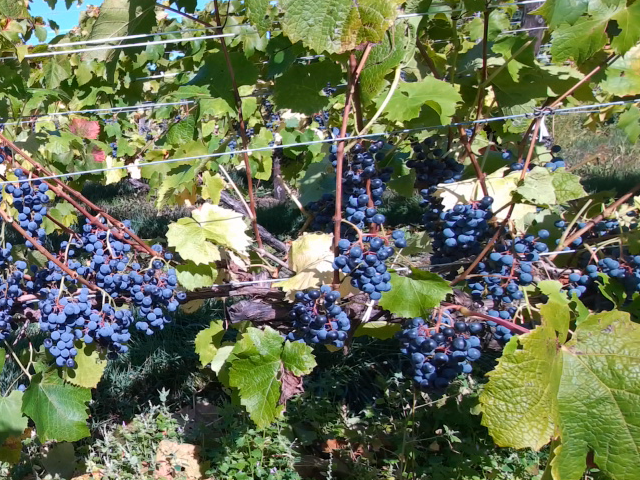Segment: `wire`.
<instances>
[{
	"label": "wire",
	"mask_w": 640,
	"mask_h": 480,
	"mask_svg": "<svg viewBox=\"0 0 640 480\" xmlns=\"http://www.w3.org/2000/svg\"><path fill=\"white\" fill-rule=\"evenodd\" d=\"M441 127H442L441 123H432L428 126H412L408 128L393 129V130L379 131V132H365V133L354 134V135H339V136H332L329 138L311 139V140L295 142V143L293 141H289L284 144H267V145H261V146L236 149L233 151L211 152V153L201 154L196 156L174 157V158L165 159L161 161H148L147 163H144V164L126 163L117 167L100 168L95 170H76L75 172L65 171L61 173H53L49 176H30L25 179L2 180L1 184L2 185H20V184H28L33 181H51L56 178H63L68 176L77 177L78 175H97V174L110 173V172H119L128 168L147 169L151 166H163V165L172 164L176 162H192V161H198V160L209 159L214 157L235 156L238 154L270 150V149H287L290 147L297 148V147H304V146H309L313 144L331 143V142L341 141V140H356V139H363L368 137H381V136H389V135H395V134L410 133L415 131H430L432 129L441 128Z\"/></svg>",
	"instance_id": "1"
},
{
	"label": "wire",
	"mask_w": 640,
	"mask_h": 480,
	"mask_svg": "<svg viewBox=\"0 0 640 480\" xmlns=\"http://www.w3.org/2000/svg\"><path fill=\"white\" fill-rule=\"evenodd\" d=\"M634 103H640V98L622 99L621 101L608 100V101H602L599 103H593L588 105L564 106L557 109H545V110L530 111L525 113H510L508 115L493 116V117L471 118V119L451 122L450 126L458 127V126L474 124V123L503 121V120H510L513 118H528V117L541 116V115H547V114H560L567 111H582V110L601 108V107L610 106V105L623 106L624 104H634Z\"/></svg>",
	"instance_id": "4"
},
{
	"label": "wire",
	"mask_w": 640,
	"mask_h": 480,
	"mask_svg": "<svg viewBox=\"0 0 640 480\" xmlns=\"http://www.w3.org/2000/svg\"><path fill=\"white\" fill-rule=\"evenodd\" d=\"M286 277H271V278H257L253 280H242V281H226L222 283H211V288H225L228 286H244V285H255L259 283H273V282H286Z\"/></svg>",
	"instance_id": "5"
},
{
	"label": "wire",
	"mask_w": 640,
	"mask_h": 480,
	"mask_svg": "<svg viewBox=\"0 0 640 480\" xmlns=\"http://www.w3.org/2000/svg\"><path fill=\"white\" fill-rule=\"evenodd\" d=\"M234 35H235V32L230 31V32H222V33L212 34V35L194 36V37L180 38V39L157 40L149 43H123V44H116V45L89 46V47H83L79 49L32 52V53L25 54L24 58L29 59V58H35V57L81 54V53L91 52V51L118 50V49H125V48H151L159 45L184 44V43H191L196 41L214 40V39H220L224 37H232Z\"/></svg>",
	"instance_id": "2"
},
{
	"label": "wire",
	"mask_w": 640,
	"mask_h": 480,
	"mask_svg": "<svg viewBox=\"0 0 640 480\" xmlns=\"http://www.w3.org/2000/svg\"><path fill=\"white\" fill-rule=\"evenodd\" d=\"M469 260H460L456 262H434V263H425V264H412L397 267V272L409 271L414 269H427V268H437V267H458L463 265H469Z\"/></svg>",
	"instance_id": "6"
},
{
	"label": "wire",
	"mask_w": 640,
	"mask_h": 480,
	"mask_svg": "<svg viewBox=\"0 0 640 480\" xmlns=\"http://www.w3.org/2000/svg\"><path fill=\"white\" fill-rule=\"evenodd\" d=\"M543 2H544V0L512 1V2H505V3L489 4L488 8L489 9H499V8L514 7V6H525V5H528V4L543 3Z\"/></svg>",
	"instance_id": "8"
},
{
	"label": "wire",
	"mask_w": 640,
	"mask_h": 480,
	"mask_svg": "<svg viewBox=\"0 0 640 480\" xmlns=\"http://www.w3.org/2000/svg\"><path fill=\"white\" fill-rule=\"evenodd\" d=\"M588 251H589L588 247H576V248L567 249V250L545 251V252H541L540 256L547 257V256H554V255H569V254H574L578 252H588Z\"/></svg>",
	"instance_id": "9"
},
{
	"label": "wire",
	"mask_w": 640,
	"mask_h": 480,
	"mask_svg": "<svg viewBox=\"0 0 640 480\" xmlns=\"http://www.w3.org/2000/svg\"><path fill=\"white\" fill-rule=\"evenodd\" d=\"M249 26L248 22L241 24H228V25H214V26H206V27H190V28H182V29H172L168 31L154 32L150 33H127V34H119L112 35L100 38H92L87 40H78V41H70V42H56L48 45L49 49L59 48V47H72V46H81V45H89L94 43H102L114 40L121 39H129V38H152V37H164L170 36L174 34H185L192 32H208V31H217V30H231V29H243Z\"/></svg>",
	"instance_id": "3"
},
{
	"label": "wire",
	"mask_w": 640,
	"mask_h": 480,
	"mask_svg": "<svg viewBox=\"0 0 640 480\" xmlns=\"http://www.w3.org/2000/svg\"><path fill=\"white\" fill-rule=\"evenodd\" d=\"M464 12H465L464 8H457V9H451V10H432V11H425V12L400 13L398 15V18L403 19V18H414V17H427V16H434V15H453V14H460Z\"/></svg>",
	"instance_id": "7"
}]
</instances>
